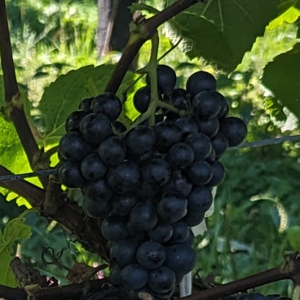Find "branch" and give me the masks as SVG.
Instances as JSON below:
<instances>
[{"label":"branch","instance_id":"obj_1","mask_svg":"<svg viewBox=\"0 0 300 300\" xmlns=\"http://www.w3.org/2000/svg\"><path fill=\"white\" fill-rule=\"evenodd\" d=\"M194 4L195 0H177L171 6L163 9L154 16L148 17L146 20L143 15H138L134 18L129 23L131 39L123 49V54L120 56L104 92L116 95L127 70L130 69V65L134 62V58L141 46L153 37L157 32V27L185 10L188 6H193Z\"/></svg>","mask_w":300,"mask_h":300},{"label":"branch","instance_id":"obj_2","mask_svg":"<svg viewBox=\"0 0 300 300\" xmlns=\"http://www.w3.org/2000/svg\"><path fill=\"white\" fill-rule=\"evenodd\" d=\"M287 280H292L295 285H300V253L298 251H293L288 256L286 265L242 277L215 288L201 290L198 294L188 295L181 300H215L233 293Z\"/></svg>","mask_w":300,"mask_h":300}]
</instances>
